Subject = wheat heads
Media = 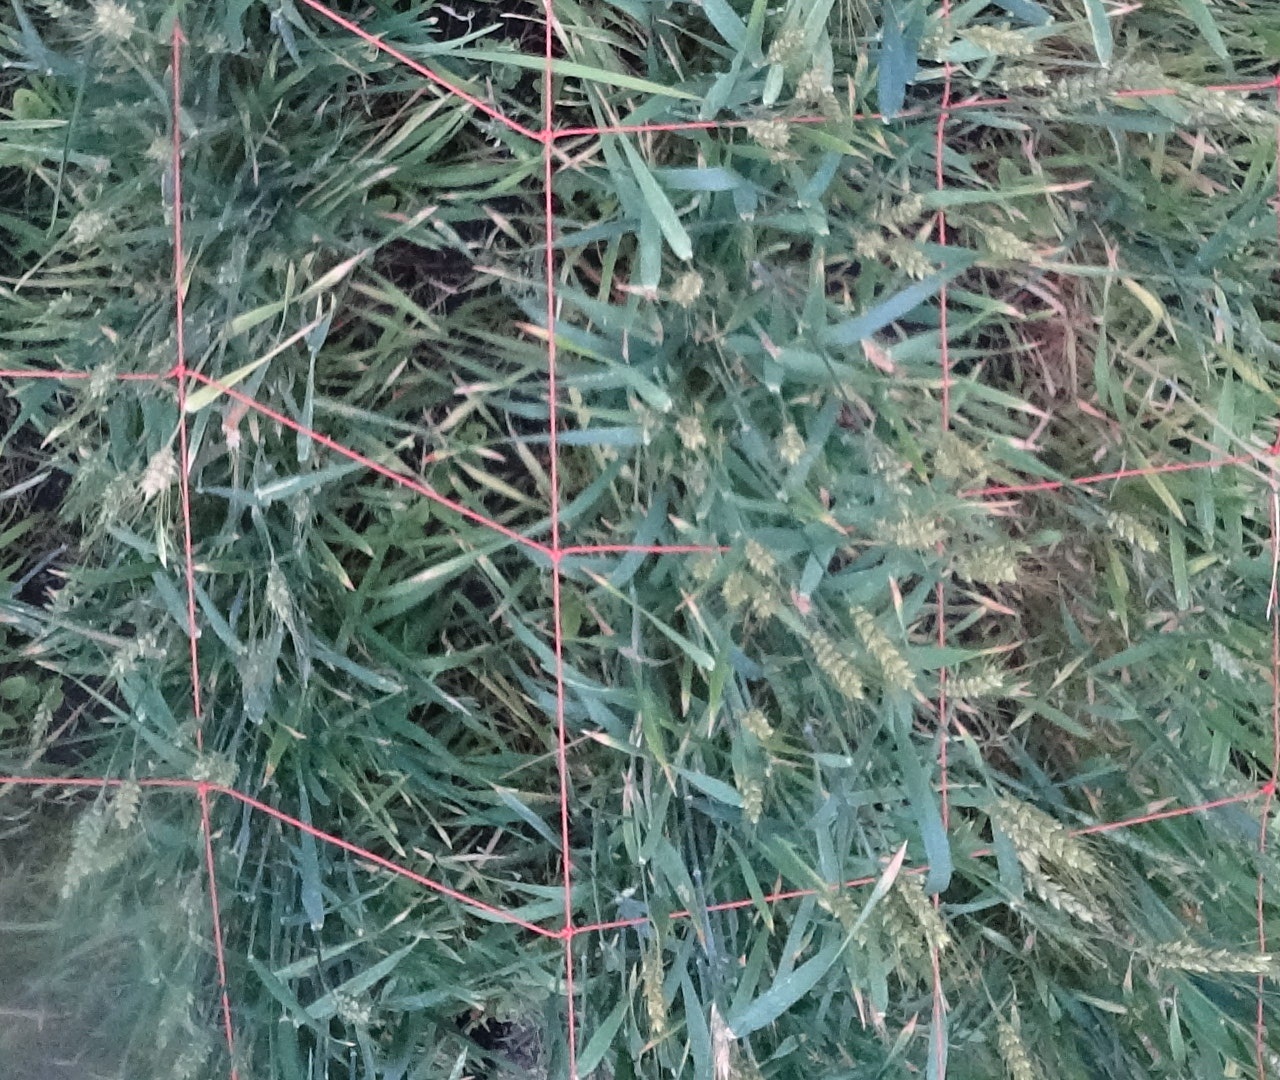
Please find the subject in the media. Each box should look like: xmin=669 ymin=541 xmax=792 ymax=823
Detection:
xmin=957 ymin=543 xmax=1030 ymax=579
xmin=92 ymin=465 xmax=135 ymax=522
xmin=724 ymin=574 xmax=743 ymax=607
xmin=111 ymin=630 xmax=156 ymax=671
xmin=732 ymin=112 xmax=788 ymax=150
xmin=676 ymin=273 xmax=707 ymax=309
xmin=829 ymin=889 xmax=862 ymax=944
xmin=1023 ymin=879 xmax=1094 ymax=921
xmin=936 ymin=668 xmax=1001 ymax=700
xmin=674 ymin=412 xmax=703 ymax=450
xmin=806 ymin=632 xmax=859 ymax=699
xmin=57 ymin=809 xmax=101 ymax=890
xmin=740 ymin=776 xmax=767 ymax=818
xmin=965 ymin=17 xmax=1029 ymax=56
xmin=876 ymin=200 xmax=922 ymax=225
xmin=76 ymin=202 xmax=107 ymax=244
xmin=1001 ymin=61 xmax=1046 ymax=88
xmin=267 ymin=566 xmax=289 ymax=610
xmin=891 ymin=245 xmax=931 ymax=278
xmin=1170 ymin=62 xmax=1265 ymax=125
xmin=868 ymin=515 xmax=957 ymax=545
xmin=140 ymin=452 xmax=180 ymax=496
xmin=1140 ymin=946 xmax=1272 ymax=974
xmin=1101 ymin=816 xmax=1171 ymax=873
xmin=115 ymin=775 xmax=142 ymax=830
xmin=1044 ymin=61 xmax=1148 ymax=110
xmin=993 ymin=793 xmax=1092 ymax=866
xmin=194 ymin=750 xmax=240 ymax=791
xmin=96 ymin=7 xmax=142 ymax=45
xmin=987 ymin=1018 xmax=1032 ymax=1075
xmin=1109 ymin=508 xmax=1158 ymax=547
xmin=848 ymin=597 xmax=918 ymax=692
xmin=1209 ymin=635 xmax=1241 ymax=677
xmin=639 ymin=957 xmax=665 ymax=1033
xmin=90 ymin=361 xmax=116 ymax=402
xmin=742 ymin=537 xmax=776 ymax=575
xmin=886 ymin=870 xmax=941 ymax=938
xmin=776 ymin=421 xmax=801 ymax=464
xmin=985 ymin=221 xmax=1037 ymax=260
xmin=757 ymin=26 xmax=805 ymax=68
xmin=923 ymin=423 xmax=982 ymax=473
xmin=742 ymin=705 xmax=771 ymax=738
